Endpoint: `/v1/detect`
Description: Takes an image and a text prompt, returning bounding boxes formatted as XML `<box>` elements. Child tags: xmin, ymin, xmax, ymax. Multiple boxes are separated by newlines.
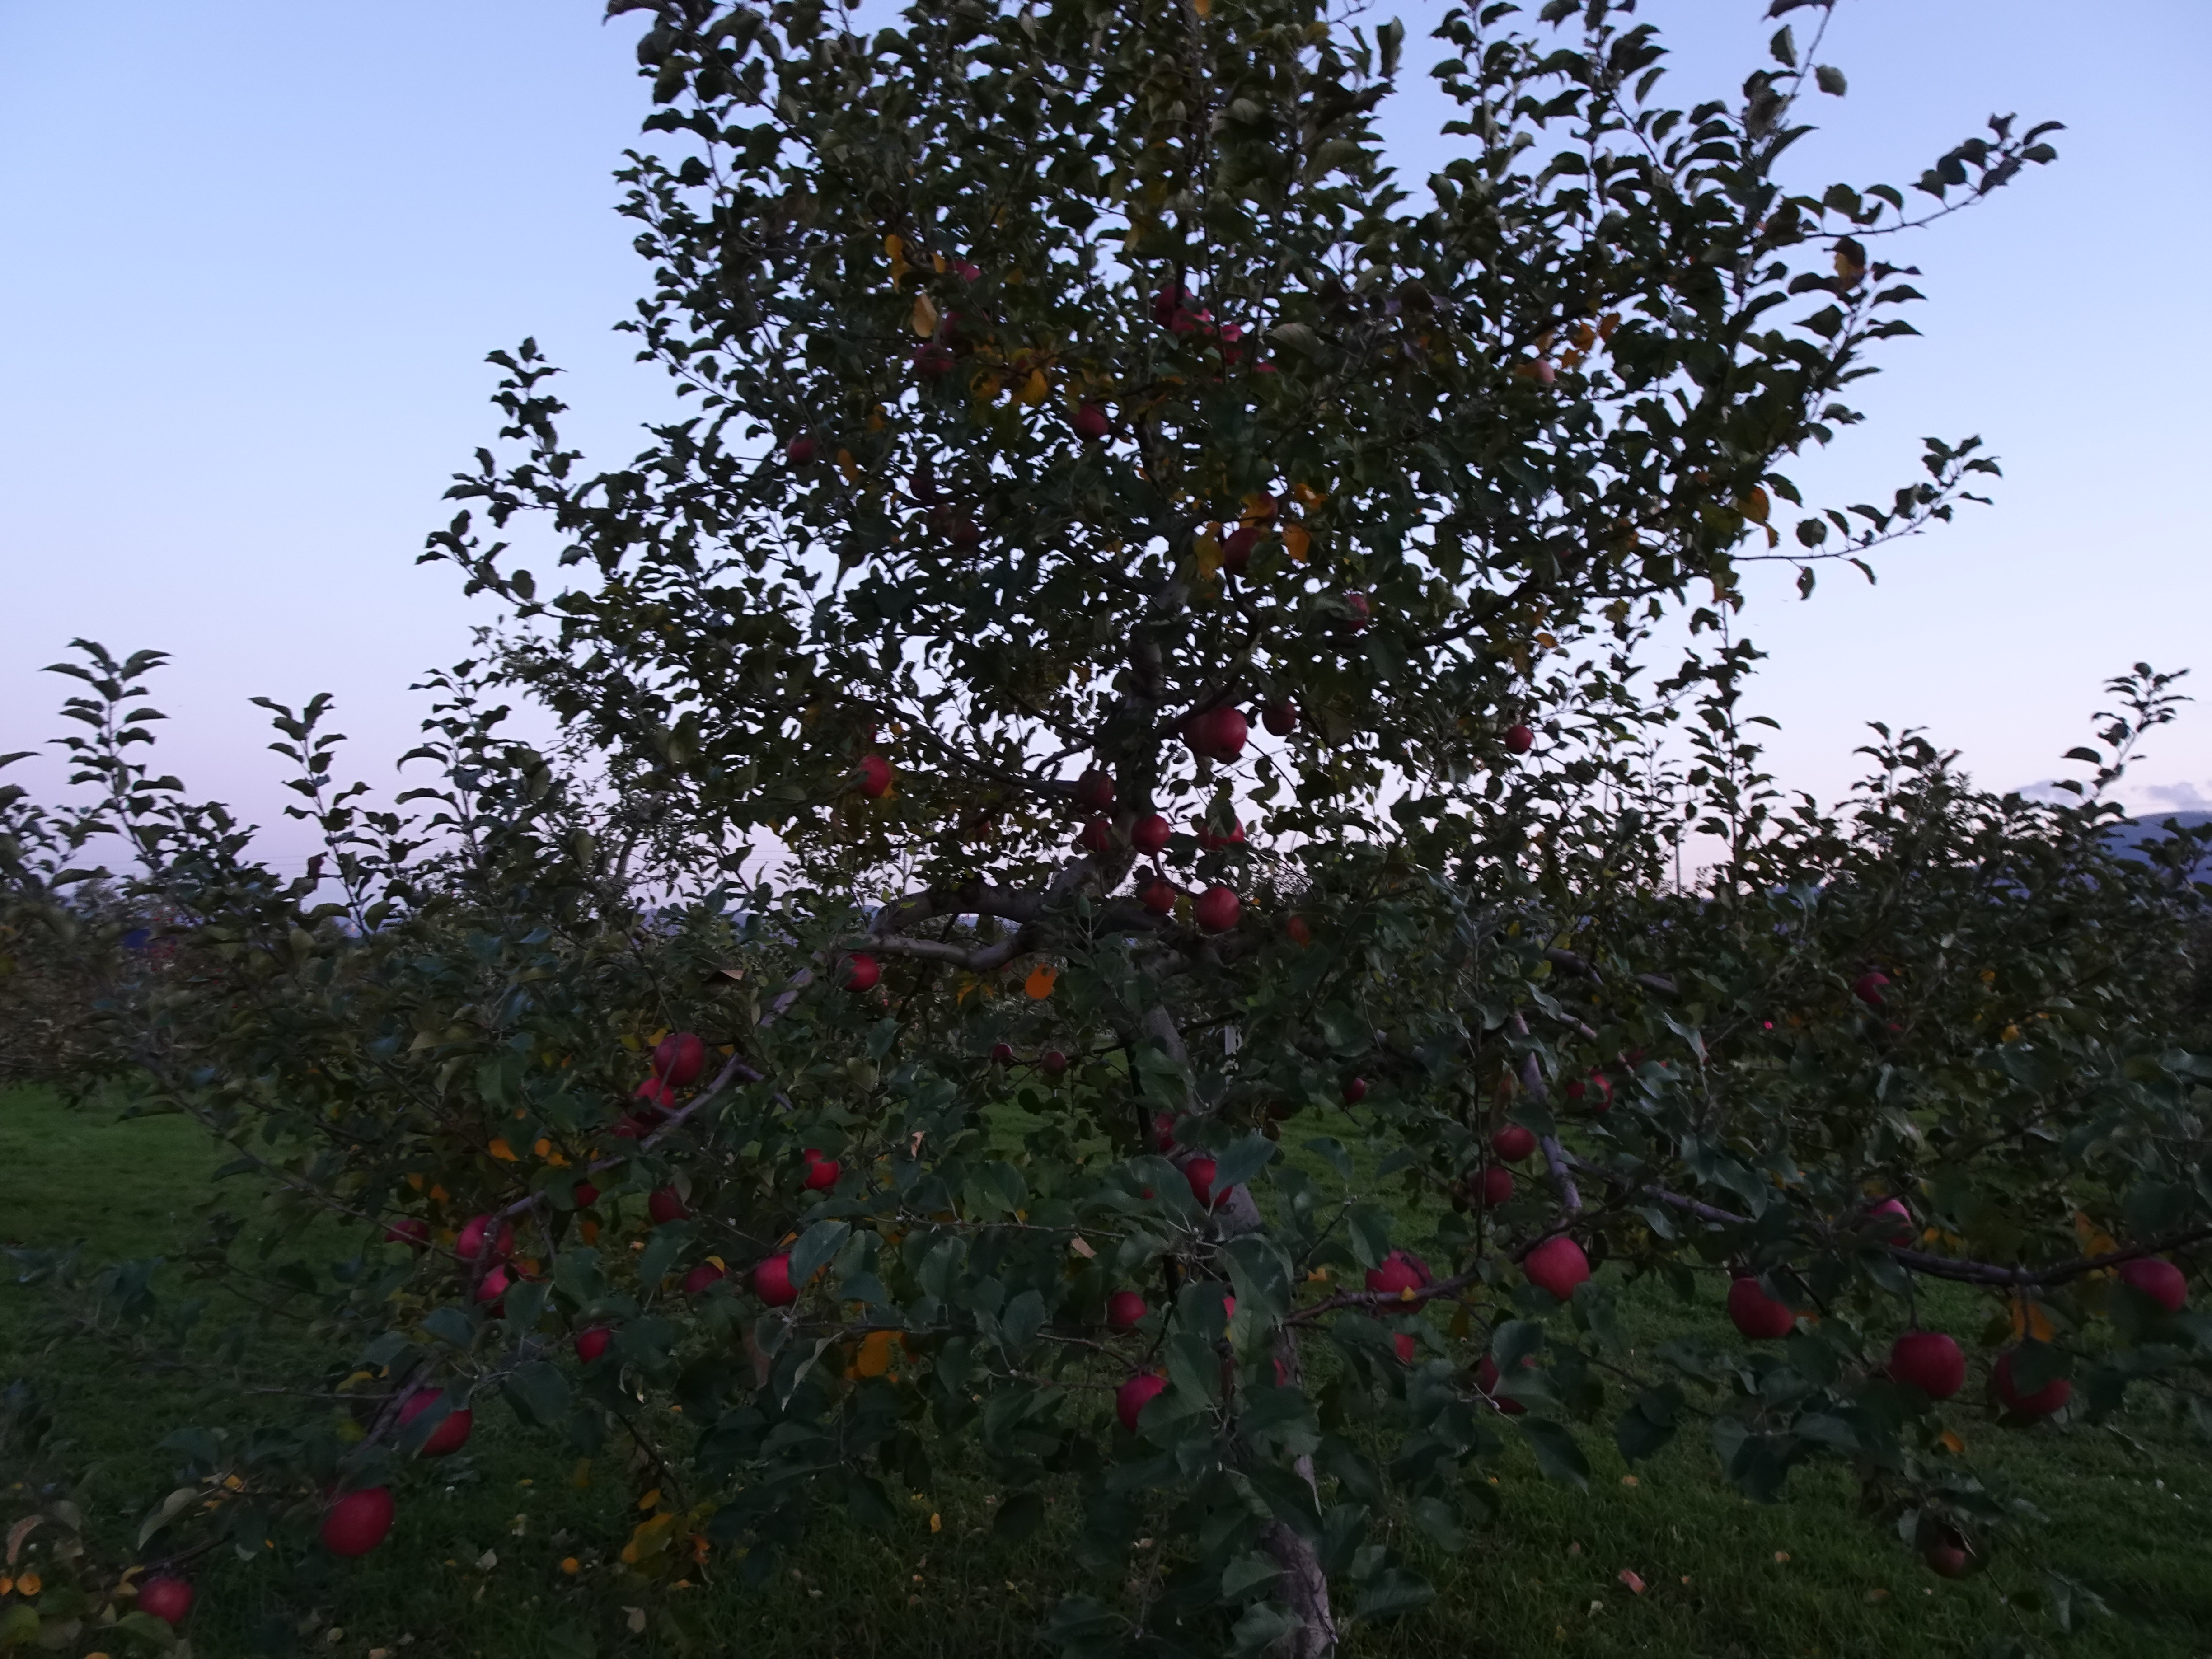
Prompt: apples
<box><xmin>1566</xmin><ymin>1068</ymin><xmax>1612</xmax><ymax>1112</ymax></box>
<box><xmin>320</xmin><ymin>1485</ymin><xmax>393</xmax><ymax>1557</ymax></box>
<box><xmin>1082</xmin><ymin>819</ymin><xmax>1112</xmax><ymax>852</ymax></box>
<box><xmin>633</xmin><ymin>1078</ymin><xmax>675</xmax><ymax>1117</ymax></box>
<box><xmin>992</xmin><ymin>1043</ymin><xmax>1012</xmax><ymax>1064</ymax></box>
<box><xmin>974</xmin><ymin>820</ymin><xmax>988</xmax><ymax>841</ymax></box>
<box><xmin>2118</xmin><ymin>1259</ymin><xmax>2185</xmax><ymax>1311</ymax></box>
<box><xmin>648</xmin><ymin>1185</ymin><xmax>690</xmax><ymax>1225</ymax></box>
<box><xmin>1864</xmin><ymin>1199</ymin><xmax>1912</xmax><ymax>1248</ymax></box>
<box><xmin>1013</xmin><ymin>354</ymin><xmax>1041</xmax><ymax>371</ymax></box>
<box><xmin>1202</xmin><ymin>705</ymin><xmax>1246</xmax><ymax>760</ymax></box>
<box><xmin>620</xmin><ymin>1116</ymin><xmax>651</xmax><ymax>1137</ymax></box>
<box><xmin>1625</xmin><ymin>1050</ymin><xmax>1667</xmax><ymax>1070</ymax></box>
<box><xmin>1223</xmin><ymin>527</ymin><xmax>1263</xmax><ymax>577</ymax></box>
<box><xmin>1078</xmin><ymin>770</ymin><xmax>1114</xmax><ymax>808</ymax></box>
<box><xmin>944</xmin><ymin>311</ymin><xmax>987</xmax><ymax>335</ymax></box>
<box><xmin>1195</xmin><ymin>886</ymin><xmax>1240</xmax><ymax>934</ymax></box>
<box><xmin>926</xmin><ymin>505</ymin><xmax>953</xmax><ymax>535</ymax></box>
<box><xmin>1994</xmin><ymin>1354</ymin><xmax>2069</xmax><ymax>1416</ymax></box>
<box><xmin>1854</xmin><ymin>972</ymin><xmax>1890</xmax><ymax>1004</ymax></box>
<box><xmin>685</xmin><ymin>1265</ymin><xmax>731</xmax><ymax>1292</ymax></box>
<box><xmin>1730</xmin><ymin>1255</ymin><xmax>1754</xmax><ymax>1282</ymax></box>
<box><xmin>1268</xmin><ymin>1099</ymin><xmax>1291</xmax><ymax>1121</ymax></box>
<box><xmin>397</xmin><ymin>1388</ymin><xmax>472</xmax><ymax>1457</ymax></box>
<box><xmin>1523</xmin><ymin>1237</ymin><xmax>1591</xmax><ymax>1302</ymax></box>
<box><xmin>1491</xmin><ymin>1125</ymin><xmax>1536</xmax><ymax>1163</ymax></box>
<box><xmin>914</xmin><ymin>343</ymin><xmax>953</xmax><ymax>378</ymax></box>
<box><xmin>576</xmin><ymin>1328</ymin><xmax>611</xmax><ymax>1364</ymax></box>
<box><xmin>753</xmin><ymin>1252</ymin><xmax>804</xmax><ymax>1308</ymax></box>
<box><xmin>1253</xmin><ymin>362</ymin><xmax>1278</xmax><ymax>372</ymax></box>
<box><xmin>1273</xmin><ymin>1358</ymin><xmax>1287</xmax><ymax>1386</ymax></box>
<box><xmin>1365</xmin><ymin>1249</ymin><xmax>1431</xmax><ymax>1312</ymax></box>
<box><xmin>1727</xmin><ymin>1280</ymin><xmax>1796</xmax><ymax>1340</ymax></box>
<box><xmin>788</xmin><ymin>434</ymin><xmax>818</xmax><ymax>467</ymax></box>
<box><xmin>1924</xmin><ymin>1537</ymin><xmax>1966</xmax><ymax>1577</ymax></box>
<box><xmin>1141</xmin><ymin>880</ymin><xmax>1175</xmax><ymax>913</ymax></box>
<box><xmin>1042</xmin><ymin>1051</ymin><xmax>1067</xmax><ymax>1077</ymax></box>
<box><xmin>1344</xmin><ymin>594</ymin><xmax>1369</xmax><ymax>629</ymax></box>
<box><xmin>1116</xmin><ymin>1374</ymin><xmax>1169</xmax><ymax>1435</ymax></box>
<box><xmin>945</xmin><ymin>260</ymin><xmax>981</xmax><ymax>284</ymax></box>
<box><xmin>574</xmin><ymin>1185</ymin><xmax>600</xmax><ymax>1209</ymax></box>
<box><xmin>1472</xmin><ymin>1167</ymin><xmax>1513</xmax><ymax>1208</ymax></box>
<box><xmin>456</xmin><ymin>1216</ymin><xmax>514</xmax><ymax>1269</ymax></box>
<box><xmin>1478</xmin><ymin>1352</ymin><xmax>1536</xmax><ymax>1412</ymax></box>
<box><xmin>1890</xmin><ymin>1332</ymin><xmax>1965</xmax><ymax>1400</ymax></box>
<box><xmin>1393</xmin><ymin>1332</ymin><xmax>1416</xmax><ymax>1364</ymax></box>
<box><xmin>1001</xmin><ymin>959</ymin><xmax>1014</xmax><ymax>972</ymax></box>
<box><xmin>1154</xmin><ymin>285</ymin><xmax>1195</xmax><ymax>329</ymax></box>
<box><xmin>137</xmin><ymin>1577</ymin><xmax>192</xmax><ymax>1625</ymax></box>
<box><xmin>1199</xmin><ymin>819</ymin><xmax>1244</xmax><ymax>851</ymax></box>
<box><xmin>654</xmin><ymin>1032</ymin><xmax>704</xmax><ymax>1087</ymax></box>
<box><xmin>863</xmin><ymin>724</ymin><xmax>876</xmax><ymax>741</ymax></box>
<box><xmin>1182</xmin><ymin>1158</ymin><xmax>1232</xmax><ymax>1209</ymax></box>
<box><xmin>594</xmin><ymin>1125</ymin><xmax>636</xmax><ymax>1139</ymax></box>
<box><xmin>898</xmin><ymin>1332</ymin><xmax>919</xmax><ymax>1365</ymax></box>
<box><xmin>839</xmin><ymin>953</ymin><xmax>879</xmax><ymax>993</ymax></box>
<box><xmin>1505</xmin><ymin>725</ymin><xmax>1532</xmax><ymax>754</ymax></box>
<box><xmin>953</xmin><ymin>520</ymin><xmax>976</xmax><ymax>547</ymax></box>
<box><xmin>1171</xmin><ymin>306</ymin><xmax>1214</xmax><ymax>336</ymax></box>
<box><xmin>1286</xmin><ymin>914</ymin><xmax>1311</xmax><ymax>947</ymax></box>
<box><xmin>1131</xmin><ymin>814</ymin><xmax>1170</xmax><ymax>856</ymax></box>
<box><xmin>1222</xmin><ymin>1295</ymin><xmax>1236</xmax><ymax>1321</ymax></box>
<box><xmin>1262</xmin><ymin>699</ymin><xmax>1296</xmax><ymax>736</ymax></box>
<box><xmin>1522</xmin><ymin>359</ymin><xmax>1554</xmax><ymax>383</ymax></box>
<box><xmin>1071</xmin><ymin>403</ymin><xmax>1109</xmax><ymax>442</ymax></box>
<box><xmin>1106</xmin><ymin>1291</ymin><xmax>1147</xmax><ymax>1337</ymax></box>
<box><xmin>1342</xmin><ymin>1077</ymin><xmax>1366</xmax><ymax>1105</ymax></box>
<box><xmin>1142</xmin><ymin>1187</ymin><xmax>1154</xmax><ymax>1200</ymax></box>
<box><xmin>799</xmin><ymin>1148</ymin><xmax>841</xmax><ymax>1192</ymax></box>
<box><xmin>385</xmin><ymin>1219</ymin><xmax>429</xmax><ymax>1245</ymax></box>
<box><xmin>580</xmin><ymin>1214</ymin><xmax>604</xmax><ymax>1245</ymax></box>
<box><xmin>857</xmin><ymin>755</ymin><xmax>895</xmax><ymax>798</ymax></box>
<box><xmin>476</xmin><ymin>1260</ymin><xmax>538</xmax><ymax>1319</ymax></box>
<box><xmin>909</xmin><ymin>474</ymin><xmax>936</xmax><ymax>500</ymax></box>
<box><xmin>1212</xmin><ymin>324</ymin><xmax>1244</xmax><ymax>366</ymax></box>
<box><xmin>1184</xmin><ymin>713</ymin><xmax>1210</xmax><ymax>757</ymax></box>
<box><xmin>1153</xmin><ymin>1109</ymin><xmax>1190</xmax><ymax>1153</ymax></box>
<box><xmin>1888</xmin><ymin>1023</ymin><xmax>1902</xmax><ymax>1031</ymax></box>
